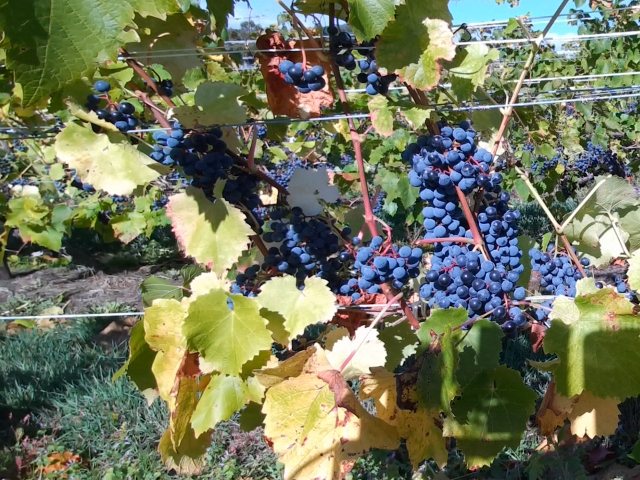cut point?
<instances>
[{"label": "cut point", "mask_w": 640, "mask_h": 480, "mask_svg": "<svg viewBox=\"0 0 640 480\" xmlns=\"http://www.w3.org/2000/svg\"><path fill=\"white\" fill-rule=\"evenodd\" d=\"M374 220L377 221L378 223H380L382 226H384L385 231L389 232L390 231V226L389 223L385 220H383L381 217L376 216L373 214Z\"/></svg>", "instance_id": "cut-point-2"}, {"label": "cut point", "mask_w": 640, "mask_h": 480, "mask_svg": "<svg viewBox=\"0 0 640 480\" xmlns=\"http://www.w3.org/2000/svg\"><path fill=\"white\" fill-rule=\"evenodd\" d=\"M478 248L480 249L482 255L484 256V260H488L487 254H486L485 250L483 249V246L481 245V243L478 244V245H475L472 248V251H476Z\"/></svg>", "instance_id": "cut-point-3"}, {"label": "cut point", "mask_w": 640, "mask_h": 480, "mask_svg": "<svg viewBox=\"0 0 640 480\" xmlns=\"http://www.w3.org/2000/svg\"><path fill=\"white\" fill-rule=\"evenodd\" d=\"M293 27L295 28V32L297 33V36L299 38V45L302 48V51H301L302 57H305L304 44L302 43V36H301V33H300L299 29H298L296 21H294V20H293Z\"/></svg>", "instance_id": "cut-point-1"}]
</instances>
